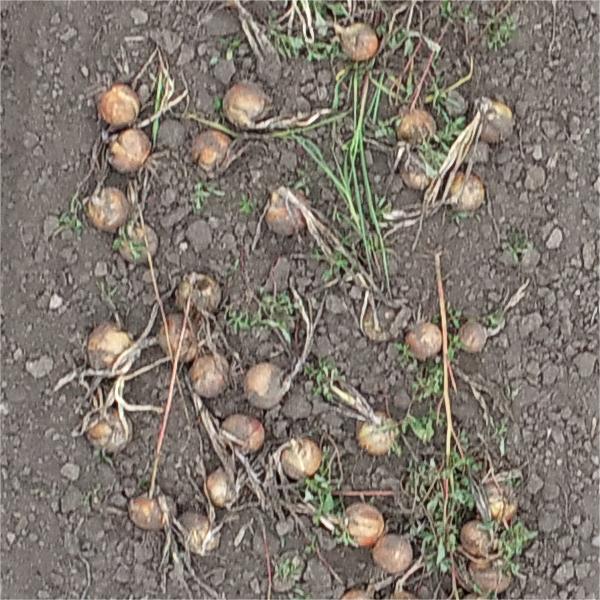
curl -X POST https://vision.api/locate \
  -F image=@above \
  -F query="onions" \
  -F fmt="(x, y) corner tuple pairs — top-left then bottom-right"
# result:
(127, 494), (164, 528)
(204, 470), (235, 504)
(108, 128), (150, 168)
(343, 502), (384, 546)
(225, 81), (266, 124)
(358, 416), (395, 453)
(459, 519), (493, 556)
(356, 300), (400, 339)
(84, 186), (128, 228)
(455, 323), (485, 353)
(190, 129), (230, 171)
(278, 438), (321, 477)
(175, 272), (217, 313)
(264, 187), (311, 234)
(84, 410), (127, 451)
(175, 508), (213, 549)
(98, 85), (138, 125)
(221, 413), (263, 452)
(85, 324), (133, 374)
(244, 362), (288, 406)
(446, 171), (484, 213)
(336, 20), (376, 59)
(396, 107), (434, 143)
(405, 320), (441, 358)
(114, 224), (153, 262)
(190, 353), (229, 396)
(370, 533), (411, 572)
(477, 483), (514, 524)
(400, 161), (430, 189)
(382, 588), (416, 600)
(161, 315), (195, 360)
(340, 583), (370, 599)
(468, 556), (504, 591)
(477, 98), (512, 138)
